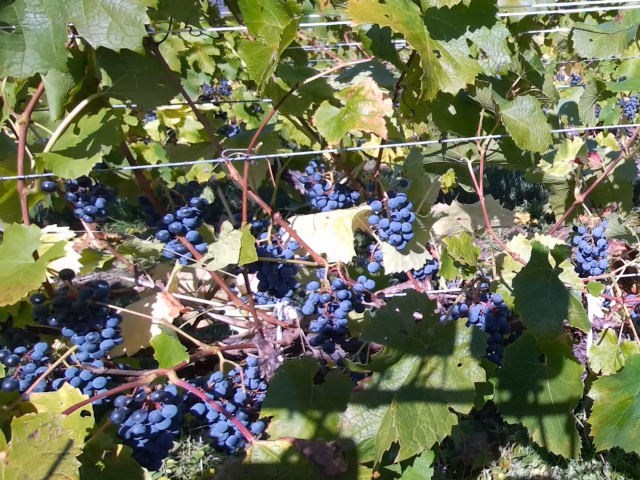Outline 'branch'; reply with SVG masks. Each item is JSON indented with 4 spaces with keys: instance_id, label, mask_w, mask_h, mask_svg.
<instances>
[{
    "instance_id": "1",
    "label": "branch",
    "mask_w": 640,
    "mask_h": 480,
    "mask_svg": "<svg viewBox=\"0 0 640 480\" xmlns=\"http://www.w3.org/2000/svg\"><path fill=\"white\" fill-rule=\"evenodd\" d=\"M258 346H259V343L257 341H252V342L222 341L220 343L207 345L206 347H203V348H198L196 351L190 352L183 360L177 363L168 365L166 367L156 368V369L155 368H111V367L99 366V365H88L86 367V370L88 372H97V373H104L109 375H139V376L135 377L134 379L128 380L125 383L118 384L101 394L92 396L90 398H87L86 400L77 402L76 404L69 405L64 410V413L66 415H69L74 411H78L80 409L88 407L89 405L106 400L112 395L119 393L120 391L127 390L130 387H134L142 382H145L151 379L154 376L165 375L170 372L179 370L183 367H186L192 361V359L198 358L200 355H205V354H208L209 352L219 351L225 348L254 349V348H257Z\"/></svg>"
},
{
    "instance_id": "2",
    "label": "branch",
    "mask_w": 640,
    "mask_h": 480,
    "mask_svg": "<svg viewBox=\"0 0 640 480\" xmlns=\"http://www.w3.org/2000/svg\"><path fill=\"white\" fill-rule=\"evenodd\" d=\"M226 166H227L228 171L231 174V176L237 181V184L240 187L245 188L242 207H241V210H240V220L244 224H247L249 222V219L247 217V212H248V209H249L250 198L252 197L257 202L258 206L261 208L263 213L265 215H267L268 217H271V218L276 219L277 221H279L281 223L282 228L284 229L285 233L290 238L296 239L297 241L302 243L304 245V247L308 250L310 255L323 268H326L328 271H331L333 269V265L331 263H329L328 261H326L324 258H322V256L320 254L317 253L315 248L311 245V243L308 241V239L306 237H304L302 234H299L298 232L293 231L291 229V227L289 226L288 221L279 212H275V211L271 210L270 208H268V206L266 205V203L264 202L262 197L255 190H252V161L245 162V181L238 174V172L236 171L234 163L226 164Z\"/></svg>"
},
{
    "instance_id": "3",
    "label": "branch",
    "mask_w": 640,
    "mask_h": 480,
    "mask_svg": "<svg viewBox=\"0 0 640 480\" xmlns=\"http://www.w3.org/2000/svg\"><path fill=\"white\" fill-rule=\"evenodd\" d=\"M208 272L213 276V278L217 282L218 286L223 290V292L232 300V302L238 308H240L245 314L252 313V316H253V319H254V324H255L257 333L259 335H262L264 333V327L262 325L261 319L270 321L274 325H277L279 328H281L284 331H287L290 334H293L295 332V329L292 326H290L289 324L284 323L283 321H281L276 316H273L272 314L264 312L262 309H260L259 307L256 306V304L254 302L253 292H252V282H251V279H250V273L248 271H245L243 273V281H244V284H245V294H246V298H247V304H248L249 307H247L237 297V295L229 288V286L221 278L220 273L214 267H210L208 269Z\"/></svg>"
},
{
    "instance_id": "4",
    "label": "branch",
    "mask_w": 640,
    "mask_h": 480,
    "mask_svg": "<svg viewBox=\"0 0 640 480\" xmlns=\"http://www.w3.org/2000/svg\"><path fill=\"white\" fill-rule=\"evenodd\" d=\"M354 67H367L368 69H371L373 67V62L371 60H352V61H348V62H343L341 64H339L338 66H334L324 72H320L317 74H314L300 82H297L296 84H294L292 87H290L289 89H287L285 91V93L280 96L277 100H275L274 102H272L269 106V108L267 109V111L265 112L263 119L261 120L259 126L257 127L256 131L253 133V135L250 137L249 143L247 144V147L245 149V152L247 154H250L253 149L254 146L256 145L257 139L261 136V134L263 133V131L266 129V126L268 124V122L270 121V118L272 116V114L274 113V111L282 104L284 103L292 94H294L296 91H298L299 89H302L316 81L322 80V79H326L336 73H340L341 71L345 70V69H350V68H354Z\"/></svg>"
},
{
    "instance_id": "5",
    "label": "branch",
    "mask_w": 640,
    "mask_h": 480,
    "mask_svg": "<svg viewBox=\"0 0 640 480\" xmlns=\"http://www.w3.org/2000/svg\"><path fill=\"white\" fill-rule=\"evenodd\" d=\"M145 40L149 43V47H150L151 51L159 59L160 64L162 66V69L169 76V78L174 83V85L177 88V90L180 92V95L182 96L183 100L185 101V103L190 108V110L193 113L195 119L203 126V128L206 131V133L210 137V139L212 141V145L214 147L215 153L218 155V157L220 159H227L228 155L222 151L221 145L219 143V139H218L217 135L213 131V129L210 126V124L208 123V121L204 117H202L200 111L198 110V108L195 105L194 101L190 98L189 94L187 93V90L182 85L180 79L176 76V74L169 67V62L167 61L166 57L161 53V51L158 49V47L156 45V41L154 40L152 35L147 33L145 35Z\"/></svg>"
},
{
    "instance_id": "6",
    "label": "branch",
    "mask_w": 640,
    "mask_h": 480,
    "mask_svg": "<svg viewBox=\"0 0 640 480\" xmlns=\"http://www.w3.org/2000/svg\"><path fill=\"white\" fill-rule=\"evenodd\" d=\"M488 152V143L483 141L481 143V149L478 156V163L476 166V188L478 193V200L480 204V210L482 214V222L487 228L490 236L502 247V249L507 253V255L518 265L526 266L528 261L526 259H522L516 255V253L512 250V248L507 244V242L496 232L493 224L489 219V212L487 208V202L485 198V191L483 186V168L485 165L486 154Z\"/></svg>"
},
{
    "instance_id": "7",
    "label": "branch",
    "mask_w": 640,
    "mask_h": 480,
    "mask_svg": "<svg viewBox=\"0 0 640 480\" xmlns=\"http://www.w3.org/2000/svg\"><path fill=\"white\" fill-rule=\"evenodd\" d=\"M640 133V127L638 128H633L630 136L627 138L625 144L623 145V147L621 148V150L612 158V160L610 161L609 165L600 173L596 176V178L593 180V182L590 185H587L583 191L573 200L571 201L562 211L561 213L557 216V219L555 220L553 226L547 231V234L549 236H553L555 233H557L559 231V228L561 227L562 222L564 221L565 217L578 205L580 204L587 196L588 194L592 191L595 190L600 182L605 179L612 171L613 169L616 167V165L619 163V161L621 160V158L629 151L630 147L632 146L633 142L636 140V138L638 137Z\"/></svg>"
},
{
    "instance_id": "8",
    "label": "branch",
    "mask_w": 640,
    "mask_h": 480,
    "mask_svg": "<svg viewBox=\"0 0 640 480\" xmlns=\"http://www.w3.org/2000/svg\"><path fill=\"white\" fill-rule=\"evenodd\" d=\"M44 89L45 86L43 84H39L36 87L32 98L25 106L21 120L18 124V172H25V127L28 123L31 111L35 104L38 102Z\"/></svg>"
},
{
    "instance_id": "9",
    "label": "branch",
    "mask_w": 640,
    "mask_h": 480,
    "mask_svg": "<svg viewBox=\"0 0 640 480\" xmlns=\"http://www.w3.org/2000/svg\"><path fill=\"white\" fill-rule=\"evenodd\" d=\"M135 175L140 179V181L143 183L144 187L146 188V192L148 193L149 197L151 198L153 205L159 210V211H163L165 209V206L160 203V200L158 198V196L156 195L155 191L153 190V186L151 185L149 179L144 175V173L141 170H133Z\"/></svg>"
},
{
    "instance_id": "10",
    "label": "branch",
    "mask_w": 640,
    "mask_h": 480,
    "mask_svg": "<svg viewBox=\"0 0 640 480\" xmlns=\"http://www.w3.org/2000/svg\"><path fill=\"white\" fill-rule=\"evenodd\" d=\"M19 185V203L22 207V223L27 225L29 223V205L26 200V182L24 179L18 180Z\"/></svg>"
},
{
    "instance_id": "11",
    "label": "branch",
    "mask_w": 640,
    "mask_h": 480,
    "mask_svg": "<svg viewBox=\"0 0 640 480\" xmlns=\"http://www.w3.org/2000/svg\"><path fill=\"white\" fill-rule=\"evenodd\" d=\"M385 153V149H380L377 155L376 164H375V174H374V183H373V195L375 198L379 197L378 186L376 185V180L379 179L380 176V166L383 154Z\"/></svg>"
},
{
    "instance_id": "12",
    "label": "branch",
    "mask_w": 640,
    "mask_h": 480,
    "mask_svg": "<svg viewBox=\"0 0 640 480\" xmlns=\"http://www.w3.org/2000/svg\"><path fill=\"white\" fill-rule=\"evenodd\" d=\"M404 275L406 279L413 284V287L416 290V293L418 295H421L423 293V288L421 287L419 280L414 275H412L409 269H406L404 271Z\"/></svg>"
},
{
    "instance_id": "13",
    "label": "branch",
    "mask_w": 640,
    "mask_h": 480,
    "mask_svg": "<svg viewBox=\"0 0 640 480\" xmlns=\"http://www.w3.org/2000/svg\"><path fill=\"white\" fill-rule=\"evenodd\" d=\"M120 147L122 148V152L126 159L129 161L131 165H139V162L135 159V157L131 154L129 150V146L125 140H121L119 142Z\"/></svg>"
}]
</instances>
